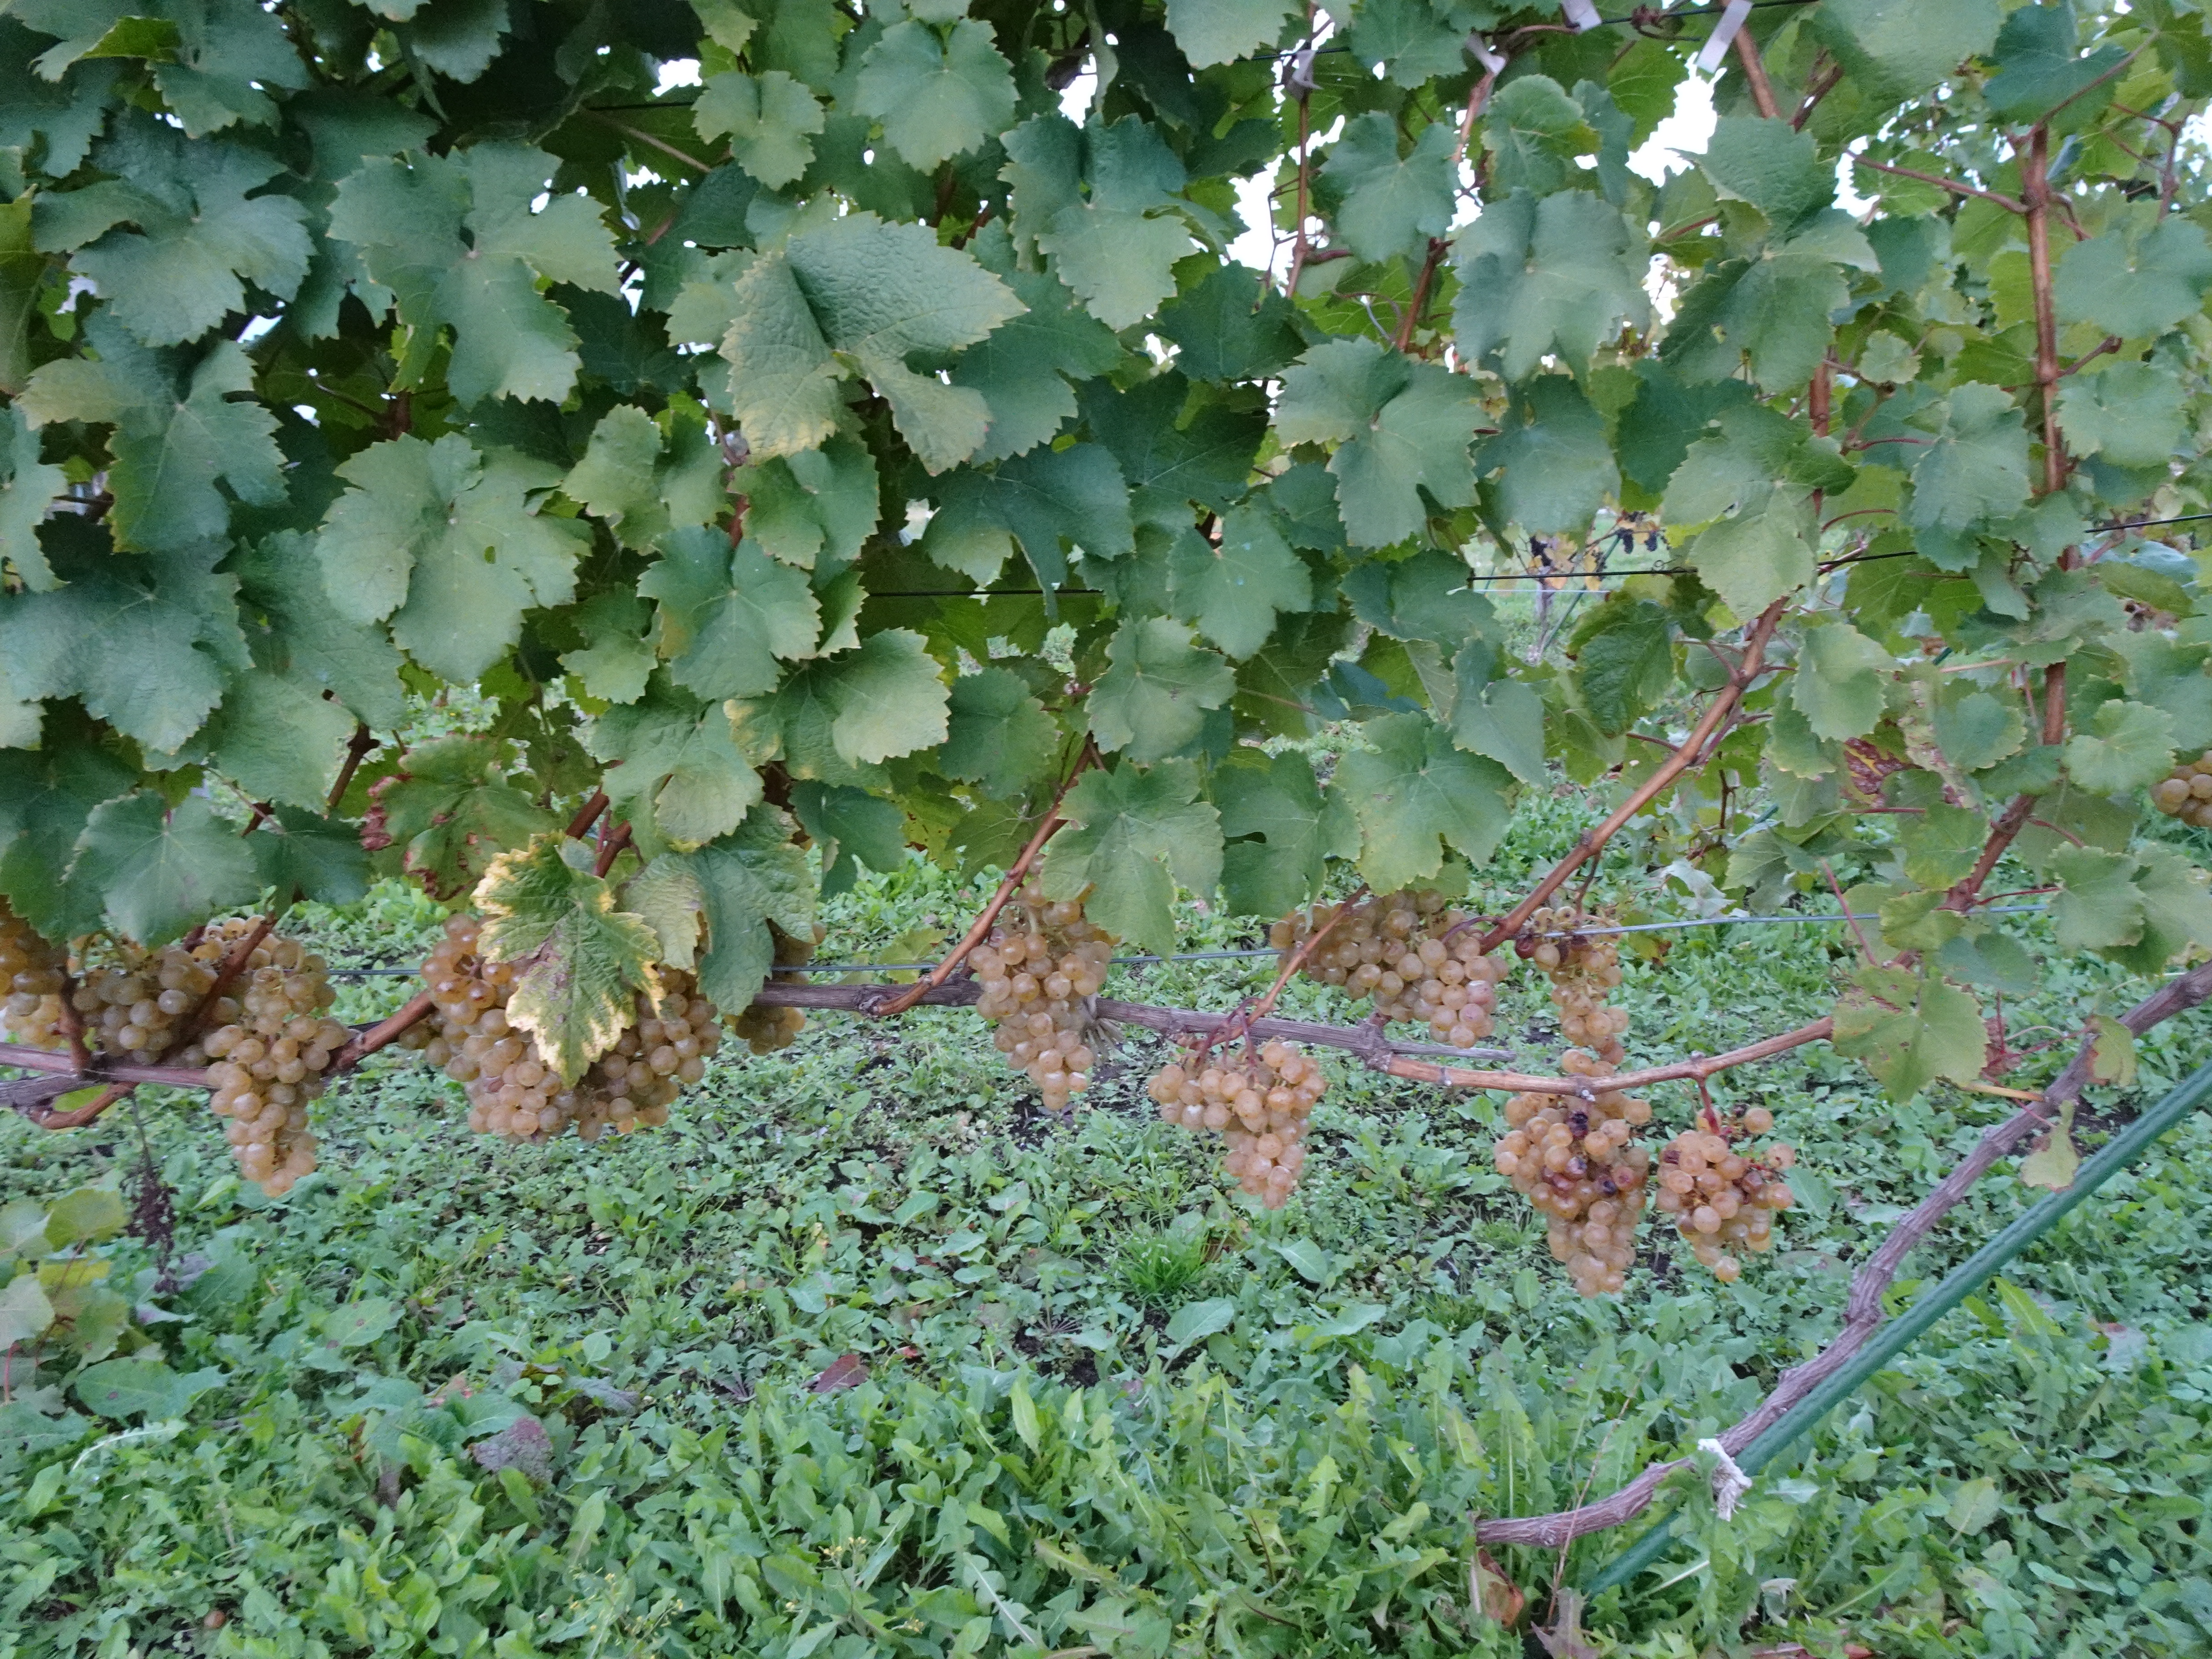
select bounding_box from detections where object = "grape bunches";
[72,935,219,1065]
[559,1073,642,1143]
[1527,530,1561,576]
[1640,523,1669,555]
[1503,1088,1659,1125]
[205,996,319,1198]
[1587,541,1614,584]
[1394,934,1510,1048]
[605,1031,683,1132]
[1654,1105,1802,1283]
[1380,883,1465,980]
[638,956,725,1089]
[246,934,346,1082]
[397,1018,482,1084]
[198,914,289,971]
[967,940,1095,1112]
[419,909,511,1026]
[774,913,832,990]
[1199,1037,1330,1210]
[1,897,66,1049]
[1485,1113,1651,1301]
[468,1002,559,1143]
[1611,520,1639,560]
[1267,888,1417,1001]
[997,854,1113,1000]
[2151,744,2212,831]
[1150,1049,1211,1133]
[719,998,814,1053]
[1518,898,1634,1081]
